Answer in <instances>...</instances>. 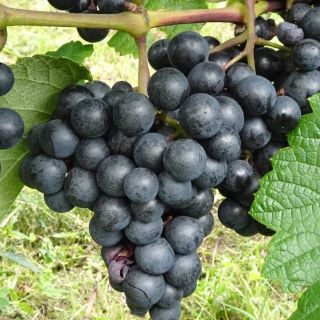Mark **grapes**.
<instances>
[{
	"label": "grapes",
	"instance_id": "obj_1",
	"mask_svg": "<svg viewBox=\"0 0 320 320\" xmlns=\"http://www.w3.org/2000/svg\"><path fill=\"white\" fill-rule=\"evenodd\" d=\"M274 11L284 22L258 14L256 38L277 36L293 52L255 44L256 72L247 55L224 72L248 40L209 54L217 39L183 31L151 45L149 98L124 81L69 85L29 130L22 184L54 212H94L89 232L109 284L136 316L179 320L201 275L197 249L214 228L212 188L227 198L224 226L275 234L248 212L270 158L289 148L286 133L320 93V6Z\"/></svg>",
	"mask_w": 320,
	"mask_h": 320
},
{
	"label": "grapes",
	"instance_id": "obj_2",
	"mask_svg": "<svg viewBox=\"0 0 320 320\" xmlns=\"http://www.w3.org/2000/svg\"><path fill=\"white\" fill-rule=\"evenodd\" d=\"M56 9L69 13L116 14L129 11L124 2L132 0H48Z\"/></svg>",
	"mask_w": 320,
	"mask_h": 320
},
{
	"label": "grapes",
	"instance_id": "obj_3",
	"mask_svg": "<svg viewBox=\"0 0 320 320\" xmlns=\"http://www.w3.org/2000/svg\"><path fill=\"white\" fill-rule=\"evenodd\" d=\"M24 121L18 112L0 107V149H8L23 135Z\"/></svg>",
	"mask_w": 320,
	"mask_h": 320
},
{
	"label": "grapes",
	"instance_id": "obj_4",
	"mask_svg": "<svg viewBox=\"0 0 320 320\" xmlns=\"http://www.w3.org/2000/svg\"><path fill=\"white\" fill-rule=\"evenodd\" d=\"M77 31L80 36L89 42H98L106 38L109 33V29L103 28H83L77 27Z\"/></svg>",
	"mask_w": 320,
	"mask_h": 320
},
{
	"label": "grapes",
	"instance_id": "obj_5",
	"mask_svg": "<svg viewBox=\"0 0 320 320\" xmlns=\"http://www.w3.org/2000/svg\"><path fill=\"white\" fill-rule=\"evenodd\" d=\"M14 83V75L10 67L0 62V96L5 95Z\"/></svg>",
	"mask_w": 320,
	"mask_h": 320
},
{
	"label": "grapes",
	"instance_id": "obj_6",
	"mask_svg": "<svg viewBox=\"0 0 320 320\" xmlns=\"http://www.w3.org/2000/svg\"><path fill=\"white\" fill-rule=\"evenodd\" d=\"M246 30H247V26H245L243 24H236L235 28H234L235 37L238 36L239 34L243 33Z\"/></svg>",
	"mask_w": 320,
	"mask_h": 320
}]
</instances>
